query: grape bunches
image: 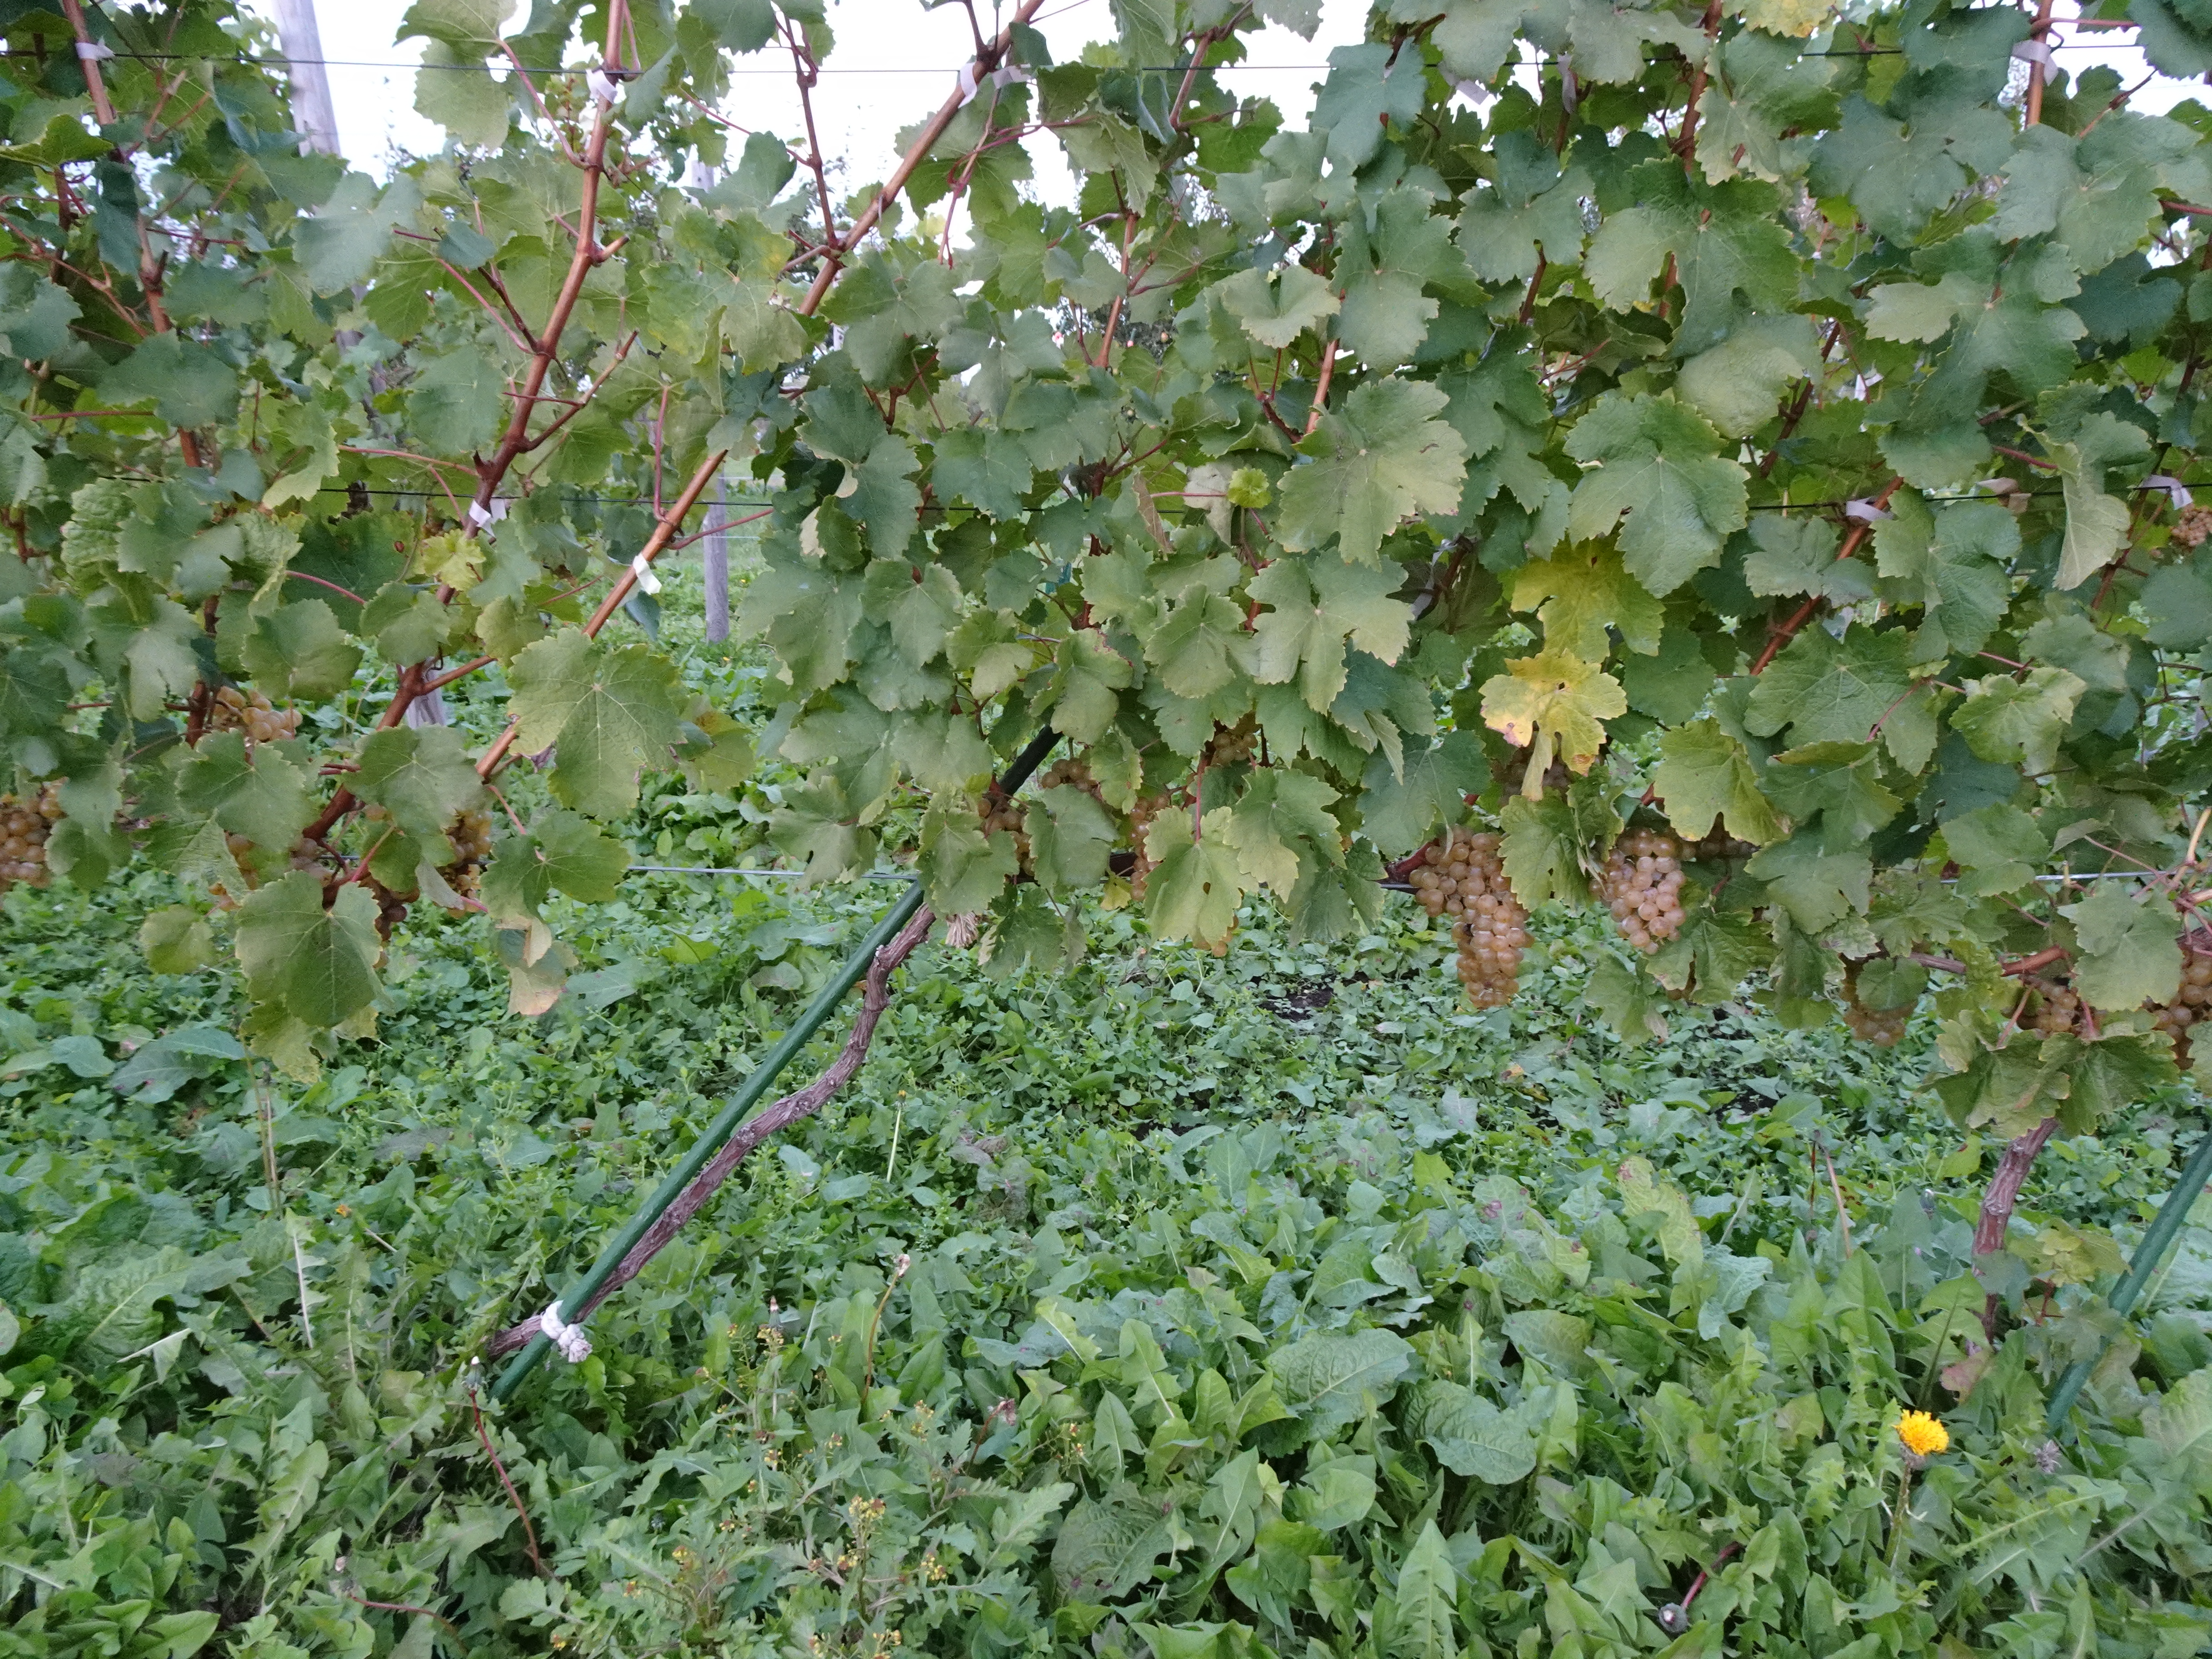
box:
[1210,712,1260,768]
[1584,826,1687,956]
[1689,807,1760,858]
[973,797,1039,876]
[1125,795,1170,902]
[1838,984,1919,1050]
[435,807,495,920]
[205,685,303,744]
[361,797,420,939]
[2136,961,2212,1074]
[0,776,70,896]
[1491,732,1581,804]
[208,835,336,914]
[1041,750,1095,788]
[1408,824,1474,917]
[1415,831,1542,1011]
[2024,976,2077,1033]
[1663,961,1698,1005]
